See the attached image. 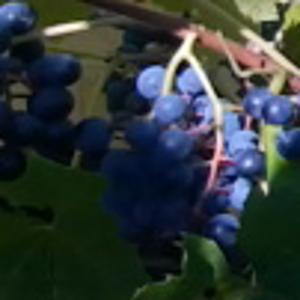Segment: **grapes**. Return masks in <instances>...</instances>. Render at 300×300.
I'll use <instances>...</instances> for the list:
<instances>
[{
    "label": "grapes",
    "instance_id": "1",
    "mask_svg": "<svg viewBox=\"0 0 300 300\" xmlns=\"http://www.w3.org/2000/svg\"><path fill=\"white\" fill-rule=\"evenodd\" d=\"M37 12L26 3L0 5V72L24 73L34 91L27 109L0 100V178L11 181L25 170L18 149L54 164H67L76 150L88 169H99L110 182L100 198L108 214H119L118 234L130 239L145 228L172 224L190 233L216 239L225 258L236 264L244 210L254 181L267 175L259 134L244 127L238 112L212 120L207 96L188 68L176 73V90L163 94L165 67H143L134 78L106 85L110 112L141 115L151 101L153 118L131 121L125 130L129 149L107 148L114 141L105 117L66 120L75 110L67 88L85 78L83 62L74 55L47 53L40 38L11 47L12 36L29 33Z\"/></svg>",
    "mask_w": 300,
    "mask_h": 300
},
{
    "label": "grapes",
    "instance_id": "2",
    "mask_svg": "<svg viewBox=\"0 0 300 300\" xmlns=\"http://www.w3.org/2000/svg\"><path fill=\"white\" fill-rule=\"evenodd\" d=\"M241 108L249 120H261L271 127H287L300 108V95L274 96L267 86L246 89ZM276 151L284 161L300 160V128L287 127L276 137Z\"/></svg>",
    "mask_w": 300,
    "mask_h": 300
}]
</instances>
